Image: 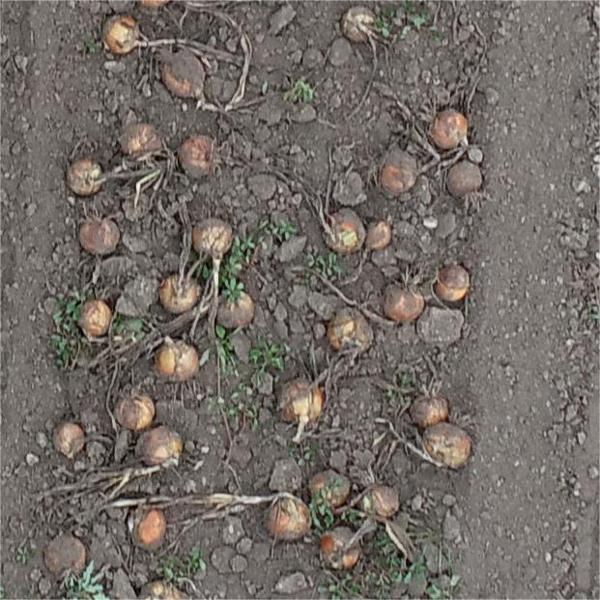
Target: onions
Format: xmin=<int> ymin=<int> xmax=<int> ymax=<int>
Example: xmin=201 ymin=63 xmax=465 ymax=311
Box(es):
xmin=130 ymin=509 xmax=167 ymax=548
xmin=309 ymin=469 xmax=347 ymax=509
xmin=98 ymin=16 xmax=136 ymax=54
xmin=265 ymin=494 xmax=307 ymax=538
xmin=115 ymin=392 xmax=154 ymax=429
xmin=121 ymin=116 xmax=159 ymax=155
xmin=278 ymin=379 xmax=324 ymax=429
xmin=411 ymin=392 xmax=446 ymax=425
xmin=216 ymin=291 xmax=251 ymax=329
xmin=52 ymin=422 xmax=84 ymax=457
xmin=176 ymin=134 xmax=213 ymax=176
xmin=76 ymin=298 xmax=111 ymax=335
xmin=432 ymin=263 xmax=466 ymax=302
xmin=160 ymin=273 xmax=198 ymax=310
xmin=318 ymin=531 xmax=357 ymax=569
xmin=159 ymin=48 xmax=202 ymax=97
xmin=443 ymin=163 xmax=480 ymax=197
xmin=362 ymin=484 xmax=397 ymax=516
xmin=427 ymin=110 xmax=467 ymax=148
xmin=140 ymin=577 xmax=177 ymax=599
xmin=325 ymin=312 xmax=369 ymax=353
xmin=138 ymin=427 xmax=181 ymax=466
xmin=375 ymin=153 xmax=415 ymax=195
xmin=65 ymin=157 xmax=101 ymax=196
xmin=382 ymin=284 xmax=422 ymax=320
xmin=44 ymin=536 xmax=87 ymax=577
xmin=321 ymin=208 xmax=361 ymax=250
xmin=153 ymin=337 xmax=197 ymax=377
xmin=421 ymin=422 xmax=470 ymax=468
xmin=340 ymin=7 xmax=375 ymax=44
xmin=79 ymin=217 xmax=117 ymax=252
xmin=364 ymin=220 xmax=392 ymax=249
xmin=190 ymin=219 xmax=232 ymax=256
xmin=136 ymin=0 xmax=173 ymax=8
